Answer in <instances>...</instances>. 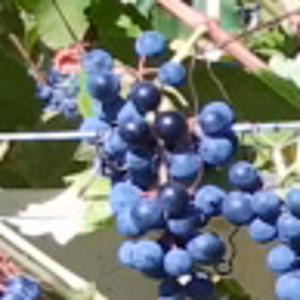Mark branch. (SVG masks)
Segmentation results:
<instances>
[{"instance_id":"obj_1","label":"branch","mask_w":300,"mask_h":300,"mask_svg":"<svg viewBox=\"0 0 300 300\" xmlns=\"http://www.w3.org/2000/svg\"><path fill=\"white\" fill-rule=\"evenodd\" d=\"M157 4L160 9L176 15L191 28L218 41L221 49L231 54L235 62L255 70L264 68L266 59L263 53L254 49L234 30L202 14L185 0H157Z\"/></svg>"}]
</instances>
